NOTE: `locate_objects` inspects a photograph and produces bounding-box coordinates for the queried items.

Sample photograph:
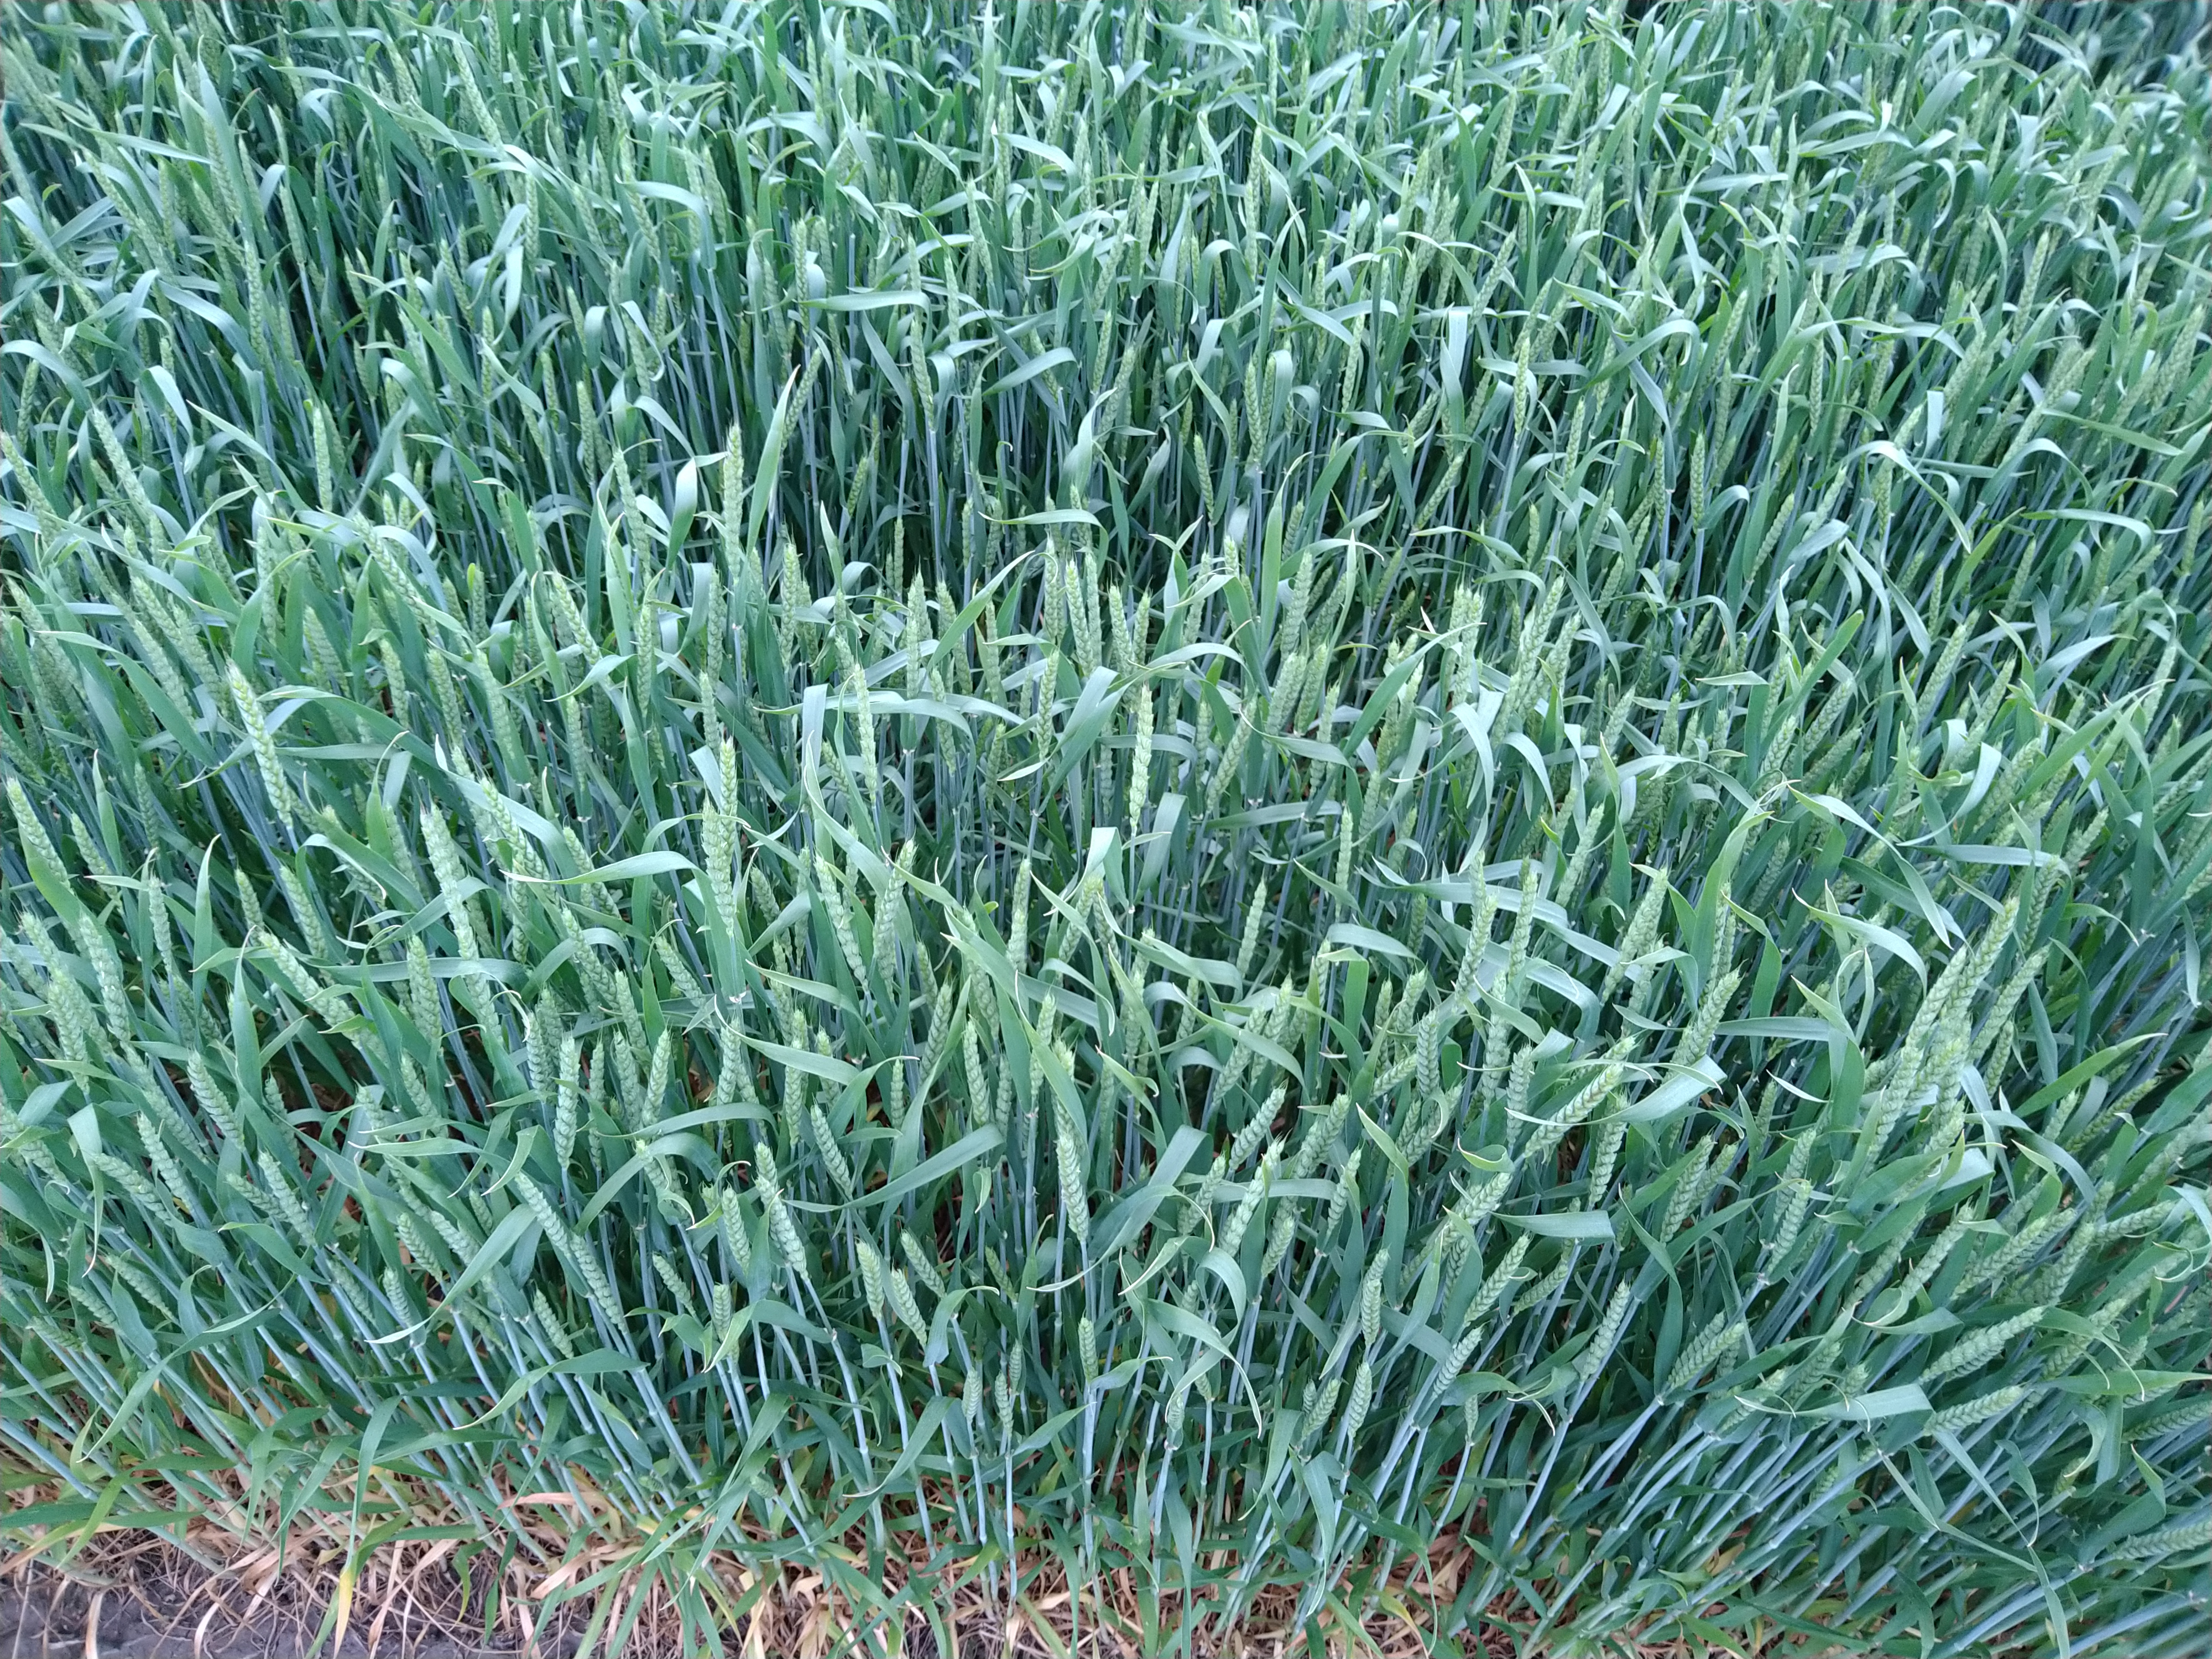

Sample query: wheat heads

[689,212,701,249]
[0,1264,16,1304]
[1771,983,1830,1048]
[1712,711,1730,769]
[720,1022,759,1105]
[2002,1182,2044,1230]
[344,255,370,318]
[101,1256,176,1317]
[648,311,655,336]
[509,636,526,732]
[1074,136,1082,172]
[1134,931,1155,979]
[848,458,869,514]
[1817,206,1848,242]
[1126,164,1146,230]
[332,95,348,150]
[1100,723,1113,814]
[133,690,159,736]
[1389,1101,1421,1176]
[1660,1139,1712,1242]
[386,379,407,455]
[1968,93,1988,139]
[780,322,795,383]
[916,943,937,1010]
[2091,1193,2210,1241]
[722,1188,750,1271]
[1390,74,1400,139]
[541,989,564,1073]
[582,363,594,400]
[280,868,332,962]
[787,321,795,355]
[1092,896,1120,962]
[543,194,574,247]
[134,764,160,850]
[995,1373,1012,1424]
[1009,1341,1022,1387]
[1167,690,1181,736]
[1696,2,1727,68]
[2083,154,2119,210]
[621,1093,670,1137]
[1177,978,1199,1041]
[2127,1106,2212,1193]
[173,607,225,711]
[1454,896,1498,1000]
[1777,435,1799,479]
[521,402,547,454]
[1603,688,1635,749]
[1083,39,1091,90]
[2073,252,2089,298]
[19,37,59,93]
[2183,863,2212,898]
[252,447,274,491]
[1057,879,1099,971]
[967,243,978,295]
[835,590,847,640]
[699,673,721,753]
[357,192,365,242]
[2082,1182,2116,1225]
[376,72,405,129]
[158,160,176,250]
[714,1284,731,1340]
[702,1122,714,1149]
[191,1093,244,1147]
[592,882,621,921]
[550,595,584,683]
[2004,411,2042,464]
[140,1094,206,1161]
[1181,555,1211,646]
[1080,1319,1098,1380]
[1561,1198,1581,1257]
[745,700,775,756]
[1218,1162,1268,1256]
[592,422,620,495]
[1136,14,1146,62]
[1726,636,1748,701]
[2090,541,2116,602]
[148,878,173,972]
[0,969,19,1011]
[1903,951,1969,1049]
[1109,586,1132,673]
[1561,536,1577,562]
[967,1369,982,1421]
[981,95,995,177]
[909,321,934,423]
[1889,750,1921,832]
[1404,392,1439,444]
[985,601,1000,703]
[0,928,49,1002]
[1712,1340,1741,1399]
[857,1243,884,1315]
[1074,122,1090,168]
[871,414,880,462]
[2150,1283,2212,1335]
[1668,141,1689,188]
[1180,399,1193,444]
[1259,996,1303,1049]
[567,287,587,352]
[51,976,113,1056]
[450,377,465,418]
[482,308,495,398]
[1828,209,1867,298]
[1249,8,1259,41]
[458,1226,496,1292]
[797,848,810,895]
[1492,93,1516,176]
[2107,1061,2131,1081]
[1214,253,1227,314]
[277,25,288,61]
[1418,197,1459,273]
[493,422,523,462]
[1280,658,1308,726]
[1220,1,1234,37]
[1933,904,2016,1035]
[1556,805,1605,907]
[1774,1130,1816,1219]
[609,215,627,253]
[1581,1283,1630,1378]
[1841,752,1872,798]
[1623,779,1664,839]
[1406,151,1429,207]
[1901,1208,1977,1293]
[1829,17,1840,47]
[1361,1251,1388,1341]
[1194,434,1214,515]
[372,159,385,212]
[708,577,725,685]
[69,1286,117,1325]
[1523,10,1533,52]
[1525,1066,1625,1155]
[1372,550,1403,610]
[131,234,154,272]
[868,258,874,287]
[2119,324,2147,372]
[2173,372,2212,429]
[712,815,736,928]
[985,725,1006,805]
[1429,18,1439,62]
[655,938,704,1005]
[383,590,403,631]
[29,1017,65,1059]
[1804,468,1847,540]
[1837,1366,1868,1397]
[2088,327,2145,417]
[635,1141,678,1209]
[1553,789,1579,839]
[1598,38,1611,107]
[1174,239,1187,331]
[1296,1,1321,61]
[921,158,942,208]
[2192,1034,2212,1072]
[1890,1163,1941,1203]
[1647,484,1666,522]
[1874,667,1883,704]
[1892,552,1925,603]
[470,1190,494,1234]
[1051,29,1058,59]
[209,169,225,218]
[1926,968,1997,1047]
[1371,221,1382,284]
[173,185,187,220]
[1812,623,1825,665]
[1445,588,1465,682]
[1650,389,1667,447]
[376,72,396,108]
[1948,422,1968,461]
[160,338,176,431]
[1656,292,1672,325]
[1761,656,1790,738]
[1006,81,1013,132]
[1269,36,1278,105]
[196,537,228,591]
[914,574,932,642]
[785,1013,807,1143]
[47,415,57,457]
[0,979,22,1041]
[2001,541,2036,620]
[384,806,419,890]
[386,1158,432,1223]
[1933,1070,1961,1129]
[664,967,715,1027]
[576,138,590,189]
[2025,1096,2079,1179]
[891,1269,927,1345]
[1749,51,1774,105]
[137,1115,192,1211]
[137,320,152,366]
[400,1054,447,1136]
[450,749,506,866]
[1121,14,1135,68]
[872,843,916,976]
[756,1143,778,1190]
[2062,828,2082,857]
[1314,257,1326,308]
[1763,244,1780,294]
[1441,1238,1470,1316]
[1098,1059,1114,1136]
[1964,275,1997,319]
[1495,0,1512,39]
[1661,693,1682,752]
[79,917,132,1043]
[794,1,810,36]
[134,580,184,649]
[2033,762,2073,813]
[88,462,149,541]
[1046,499,1065,554]
[259,936,363,1035]
[1511,604,1522,649]
[235,869,265,947]
[1307,567,1334,613]
[326,709,356,745]
[1865,268,1885,318]
[1877,465,1892,539]
[1785,43,1797,88]
[637,605,652,712]
[1538,332,1556,391]
[226,1175,290,1221]
[701,1187,722,1220]
[1374,982,1393,1076]
[1803,729,1860,788]
[1120,244,1134,297]
[383,493,404,558]
[356,715,377,745]
[1101,133,1111,196]
[1916,628,1968,719]
[1397,1088,1464,1172]
[701,800,717,856]
[1467,232,1517,330]
[1192,235,1200,294]
[32,293,66,346]
[227,995,235,1023]
[1044,545,1058,640]
[793,222,810,328]
[844,827,857,898]
[1664,287,1700,368]
[867,117,881,168]
[953,425,963,464]
[908,235,921,291]
[354,340,372,395]
[968,967,1001,1038]
[1348,1364,1373,1431]
[1506,1046,1534,1148]
[1487,207,1502,240]
[1442,409,1455,460]
[127,1048,205,1157]
[2140,170,2175,228]
[1241,530,1249,568]
[655,288,666,342]
[2198,948,2212,988]
[2142,645,2177,728]
[1204,144,1217,202]
[1454,57,1463,108]
[1360,0,1368,45]
[354,519,440,633]
[835,349,847,391]
[1710,438,1737,485]
[998,104,1011,183]
[1375,114,1387,170]
[566,697,586,786]
[2019,858,2060,956]
[201,416,212,443]
[432,805,465,881]
[1352,219,1373,276]
[1297,645,1329,731]
[1093,350,1136,457]
[524,175,539,260]
[20,914,62,975]
[579,968,623,1017]
[963,1021,990,1124]
[749,549,765,602]
[1341,312,1365,413]
[1262,1219,1296,1275]
[702,148,727,237]
[749,867,790,951]
[1929,217,1965,271]
[2121,1403,2212,1442]
[70,815,123,910]
[2019,1388,2049,1414]
[1462,750,1477,798]
[1585,134,1600,171]
[1508,872,1539,982]
[764,260,788,350]
[0,1097,70,1187]
[900,1233,945,1296]
[303,607,349,695]
[62,348,88,381]
[1463,246,1481,293]
[1749,840,1790,910]
[1471,852,1487,918]
[1791,53,1811,107]
[1667,974,1742,1079]
[822,53,833,112]
[1597,557,1625,616]
[828,313,839,350]
[871,598,885,665]
[553,126,566,163]
[887,665,907,688]
[1020,669,1033,721]
[856,9,868,48]
[1616,1186,1632,1244]
[944,255,960,344]
[193,183,244,263]
[551,577,601,665]
[1012,208,1025,284]
[879,167,888,202]
[895,518,904,592]
[1229,1090,1286,1169]
[494,110,513,144]
[259,1154,316,1244]
[1925,1388,2016,1432]
[279,306,295,361]
[345,865,385,905]
[856,239,866,283]
[913,37,921,69]
[2111,1523,2212,1557]
[263,1077,299,1159]
[1168,693,1180,791]
[624,317,651,397]
[785,1064,803,1142]
[2138,173,2159,208]
[1871,407,1923,498]
[1831,30,1848,81]
[931,670,946,703]
[174,37,202,103]
[1090,241,1125,310]
[1590,1096,1630,1205]
[2197,628,2212,659]
[472,571,490,644]
[1559,38,1580,118]
[1799,267,1823,329]
[648,1,666,44]
[280,187,304,263]
[1553,73,1587,151]
[1688,1144,1738,1211]
[435,313,453,346]
[1271,1097,1352,1228]
[568,1234,627,1329]
[1300,58,1310,103]
[1769,1037,1791,1059]
[936,586,974,695]
[316,162,324,198]
[1211,1009,1267,1101]
[1969,508,1988,541]
[854,665,877,787]
[1159,136,1170,220]
[431,1212,475,1261]
[1066,59,1084,116]
[1854,271,1868,316]
[740,319,750,363]
[684,150,704,246]
[1466,1395,1479,1434]
[891,168,899,202]
[1963,825,2015,887]
[1452,595,1484,705]
[1719,914,1736,979]
[162,980,205,1047]
[821,741,851,797]
[1628,594,1647,616]
[588,1045,605,1166]
[1568,190,1603,283]
[1518,204,1527,252]
[1588,677,1607,742]
[817,1033,840,1107]
[541,352,560,425]
[132,624,195,726]
[1065,561,1092,676]
[1963,609,1981,638]
[1517,578,1564,695]
[910,161,926,207]
[1513,1262,1570,1313]
[279,38,303,102]
[1883,191,1895,245]
[663,202,679,253]
[30,1318,82,1349]
[716,590,728,634]
[1804,784,1841,850]
[524,759,544,803]
[390,378,408,411]
[995,1094,1017,1136]
[44,728,71,778]
[524,596,544,680]
[1770,126,1782,163]
[834,591,855,690]
[1086,555,1102,671]
[1483,502,1502,536]
[907,621,919,698]
[963,363,980,422]
[22,706,42,761]
[984,501,1003,566]
[1314,256,1327,353]
[2066,1081,2158,1152]
[876,255,887,286]
[2005,866,2028,901]
[996,1056,1012,1137]
[1635,639,1654,695]
[1417,1013,1440,1096]
[1634,515,1651,558]
[755,1158,808,1274]
[2092,1268,2153,1326]
[1045,89,1066,150]
[885,554,893,591]
[1813,1445,1876,1501]
[1529,295,1570,360]
[1125,974,1145,1056]
[1972,742,2042,830]
[0,1209,9,1246]
[767,613,780,643]
[1490,675,1521,747]
[1423,181,1443,240]
[609,1098,627,1129]
[1344,202,1357,259]
[1984,1021,2015,1096]
[1906,1020,1971,1103]
[1241,574,1257,617]
[1380,258,1390,299]
[355,1,368,29]
[2100,364,2161,443]
[439,241,476,330]
[6,783,71,889]
[72,284,106,332]
[380,641,410,728]
[2045,351,2092,406]
[1244,364,1263,459]
[1589,689,1634,773]
[2152,751,2212,818]
[618,34,627,88]
[1601,870,1670,1001]
[975,718,993,756]
[848,67,857,119]
[738,627,747,677]
[1964,227,1985,289]
[1768,1181,1812,1271]
[1991,763,2072,841]
[1998,1228,2095,1305]
[67,556,83,599]
[1790,1416,1831,1436]
[390,53,436,160]
[1045,486,1049,528]
[1865,1094,1937,1168]
[1519,855,1531,888]
[1743,818,1764,857]
[995,165,1003,205]
[1847,1211,1927,1306]
[1121,396,1131,456]
[131,592,168,644]
[1136,1034,1150,1089]
[124,528,145,577]
[1261,161,1271,205]
[532,1290,574,1358]
[605,70,627,133]
[1920,1308,2047,1378]
[1261,356,1277,435]
[1335,810,1353,913]
[667,1155,683,1203]
[1584,42,1599,97]
[257,528,277,646]
[356,1087,397,1143]
[1450,198,1457,296]
[851,162,866,194]
[0,726,45,784]
[1753,494,1795,566]
[1,51,68,132]
[453,44,502,146]
[1682,714,1699,755]
[1667,1113,1685,1148]
[287,529,327,590]
[314,407,333,511]
[613,1033,642,1130]
[1587,489,1614,556]
[458,226,469,272]
[367,920,408,1001]
[1708,886,1730,982]
[720,737,738,847]
[487,1,502,76]
[1781,206,1792,243]
[383,1270,413,1326]
[51,219,86,276]
[89,161,138,228]
[1973,394,2022,463]
[1358,772,1382,852]
[2090,1385,2181,1409]
[1030,330,1058,403]
[286,58,304,100]
[1863,355,1891,439]
[214,240,238,297]
[1869,308,1898,409]
[0,627,28,685]
[1866,1051,1924,1160]
[1220,362,1229,393]
[1080,494,1093,549]
[377,170,389,212]
[1943,332,1986,405]
[1904,880,1946,931]
[1510,818,1545,860]
[1229,399,1238,455]
[1716,72,1743,145]
[1182,1282,1199,1313]
[325,707,369,773]
[1141,184,1157,269]
[1550,762,1574,800]
[1862,67,1872,110]
[620,137,636,186]
[1748,182,1770,234]
[1884,936,1937,991]
[2129,266,2154,322]
[1370,1054,1419,1100]
[398,1214,441,1275]
[781,349,822,448]
[1377,696,1399,767]
[1047,544,1066,638]
[512,858,530,963]
[1545,25,1567,80]
[528,39,543,74]
[984,1247,1016,1302]
[796,850,810,949]
[35,320,60,355]
[1131,684,1154,822]
[1308,575,1347,649]
[1749,1093,1778,1164]
[230,671,292,823]
[1972,324,2011,388]
[1172,159,1184,225]
[342,570,387,633]
[1407,895,1428,955]
[1177,1203,1189,1236]
[835,639,857,692]
[397,1094,448,1138]
[828,314,845,381]
[1881,262,1894,310]
[1537,535,1554,574]
[596,150,612,200]
[1946,663,2015,774]
[1006,861,1031,969]
[428,650,463,745]
[1415,454,1464,527]
[780,545,800,661]
[160,338,174,375]
[462,971,504,1048]
[526,1013,549,1099]
[597,100,611,158]
[91,412,151,519]
[1433,1327,1483,1394]
[962,500,973,566]
[2085,1338,2147,1398]
[1399,635,1419,664]
[1223,536,1239,577]
[1398,254,1416,322]
[451,463,464,518]
[890,33,897,61]
[414,460,424,493]
[488,185,506,227]
[1828,392,1858,461]
[392,981,416,1020]
[325,405,347,470]
[389,52,420,109]
[568,60,586,96]
[844,16,853,51]
[1206,700,1258,809]
[1520,620,1580,715]
[497,491,517,551]
[1093,311,1113,389]
[65,245,87,277]
[204,486,218,527]
[90,1154,179,1224]
[649,725,664,762]
[1053,1040,1075,1078]
[1440,1177,1514,1252]
[1044,499,1049,611]
[1463,1237,1530,1324]
[1321,235,1333,263]
[1450,60,1456,104]
[1759,717,1797,793]
[1390,808,1418,869]
[1916,238,1930,272]
[1070,485,1090,544]
[400,253,424,312]
[1970,949,2052,1049]
[643,1030,671,1126]
[801,583,819,661]
[573,189,602,248]
[421,808,502,1042]
[1567,153,1585,232]
[1431,134,1443,184]
[246,242,265,353]
[652,1254,692,1305]
[1526,505,1540,566]
[378,175,397,248]
[907,583,917,619]
[1133,592,1151,667]
[284,786,324,832]
[557,7,567,59]
[1431,255,1454,332]
[723,424,744,561]
[1186,1156,1227,1233]
[1056,1097,1090,1239]
[1691,434,1706,525]
[1927,565,1944,636]
[1856,145,1888,187]
[1809,339,1823,430]
[399,313,434,394]
[1348,1,1360,51]
[407,934,443,1048]
[1664,564,1680,600]
[303,619,322,676]
[1891,79,1906,123]
[2105,545,2162,602]
[1037,652,1059,758]
[172,977,222,1042]
[1345,69,1362,142]
[1467,1010,1513,1118]
[48,983,91,1093]
[931,671,956,770]
[137,220,174,283]
[962,918,1003,1041]
[1709,291,1748,377]
[815,860,869,987]
[1245,182,1257,278]
[476,652,514,756]
[784,1093,809,1143]
[508,52,530,125]
[2059,137,2092,184]
[442,579,467,629]
[73,60,116,127]
[1237,881,1268,974]
[1128,83,1140,132]
[615,971,652,1072]
[1596,339,1616,408]
[1937,728,1985,800]
[1625,487,1656,534]
[1281,553,1314,656]
[1372,395,1438,486]
[204,122,241,217]
[2042,802,2070,839]
[1722,1370,1786,1430]
[1195,703,1210,785]
[353,784,368,828]
[1895,1117,1964,1197]
[149,514,171,566]
[1712,361,1732,457]
[1959,864,1990,892]
[409,110,436,160]
[2054,1458,2085,1495]
[1679,608,1715,669]
[28,649,59,721]
[1392,972,1428,1044]
[1642,167,1662,232]
[696,629,707,669]
[35,320,87,379]
[516,1174,566,1258]
[2153,719,2182,765]
[1550,617,1581,684]
[1080,166,1090,212]
[2040,1305,2123,1380]
[1464,369,1493,435]
[639,430,648,492]
[771,941,793,1038]
[561,913,622,1013]
[1042,2,1049,54]
[1922,1102,1966,1162]
[746,217,764,265]
[593,683,613,740]
[461,1301,504,1347]
[1850,904,1890,973]
[1513,279,1552,351]
[1264,656,1297,736]
[1252,983,1292,1078]
[1788,602,1805,637]
[1309,687,1340,788]
[1464,1077,1492,1124]
[1152,357,1161,408]
[969,26,982,62]
[2043,1091,2079,1142]
[17,362,39,447]
[528,991,565,1049]
[1899,218,1912,250]
[611,449,653,565]
[554,1033,580,1165]
[816,220,835,297]
[1524,686,1533,737]
[2180,501,2204,566]
[1953,1219,2050,1294]
[2176,815,2212,861]
[2012,231,2050,341]
[1395,665,1424,747]
[527,511,541,564]
[1786,684,1852,772]
[193,1,221,79]
[1667,1324,1744,1386]
[2062,809,2109,872]
[1327,1151,1361,1232]
[1788,1343,1841,1402]
[1603,244,1622,284]
[397,497,411,564]
[814,81,824,127]
[920,986,954,1083]
[1015,505,1026,573]
[808,37,817,81]
[282,68,294,104]
[1316,940,1330,1007]
[484,1177,494,1236]
[1281,502,1304,564]
[1030,997,1057,1094]
[328,1259,374,1320]
[481,783,558,900]
[2057,697,2086,747]
[891,1061,904,1130]
[35,647,85,719]
[0,436,63,551]
[736,1065,763,1128]
[1568,1039,1633,1086]
[1276,1003,1308,1075]
[921,126,947,206]
[2148,309,2204,407]
[1790,1224,1827,1268]
[1797,169,1809,213]
[239,138,265,222]
[504,169,526,205]
[811,1106,852,1192]
[1514,339,1529,429]
[967,182,993,279]
[203,526,244,604]
[384,328,400,360]
[1587,190,1603,253]
[308,261,325,292]
[1029,194,1042,272]
[1789,291,1820,389]
[1564,400,1586,481]
[1807,874,1850,923]
[7,583,88,696]
[1022,1112,1030,1148]
[873,91,882,127]
[1894,1,1928,40]
[626,191,660,257]
[1326,27,1339,63]
[1730,349,1756,402]
[562,829,623,925]
[1988,114,2006,175]
[580,882,596,925]
[279,512,315,566]
[889,169,904,235]
[1622,942,1661,1037]
[1654,439,1666,531]
[1088,165,1096,211]
[1391,591,1416,629]
[577,382,595,473]
[364,157,377,201]
[1249,127,1263,207]
[1399,1240,1434,1286]
[385,379,399,419]
[1303,1380,1340,1437]
[1586,755,1618,785]
[1880,51,1896,97]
